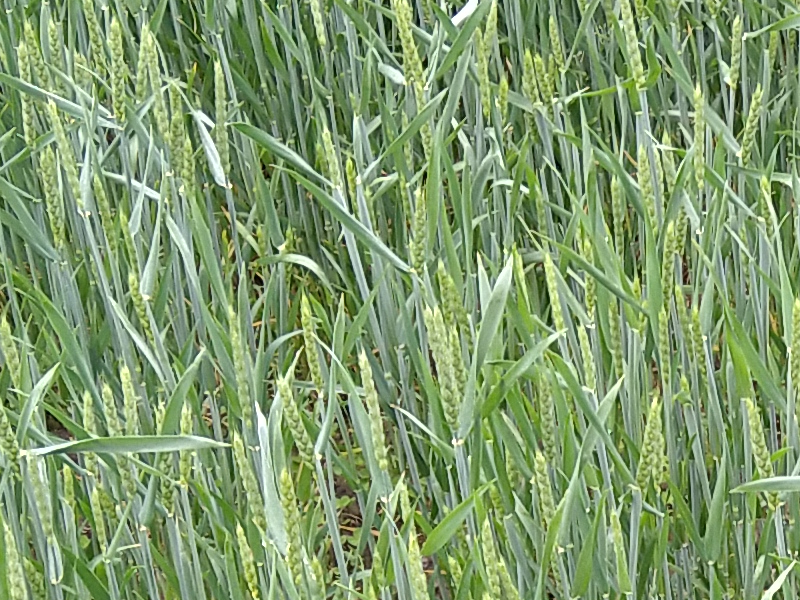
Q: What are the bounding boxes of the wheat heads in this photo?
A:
[234,432,266,533]
[608,302,625,380]
[603,0,611,18]
[653,143,665,215]
[481,515,500,597]
[636,146,657,234]
[0,354,22,468]
[769,29,779,68]
[233,332,253,430]
[420,0,430,21]
[414,187,426,279]
[487,486,504,518]
[636,300,649,337]
[90,490,105,553]
[789,25,795,50]
[610,176,625,264]
[279,470,303,585]
[498,76,508,115]
[692,305,709,385]
[534,53,554,122]
[101,383,136,493]
[236,522,259,597]
[256,226,265,255]
[414,83,434,161]
[284,222,292,288]
[97,482,116,520]
[136,22,151,100]
[635,279,641,298]
[680,373,690,399]
[728,14,744,87]
[407,536,436,600]
[359,346,387,470]
[574,0,588,14]
[170,115,181,169]
[659,308,673,385]
[315,143,330,182]
[403,52,412,84]
[168,84,184,134]
[684,172,692,202]
[109,16,125,125]
[474,27,491,117]
[578,326,597,390]
[448,274,475,349]
[437,259,453,327]
[663,131,678,192]
[633,399,658,495]
[349,93,356,108]
[403,0,412,25]
[83,391,97,474]
[506,446,516,487]
[321,125,343,195]
[179,402,193,489]
[0,318,22,389]
[393,0,424,80]
[345,155,359,213]
[497,565,529,600]
[312,558,326,600]
[0,45,7,65]
[22,558,56,600]
[372,552,386,588]
[155,406,168,436]
[28,452,53,531]
[25,20,50,91]
[549,549,563,592]
[160,451,175,513]
[526,109,538,141]
[448,556,477,600]
[300,296,323,392]
[633,0,644,25]
[82,0,106,83]
[145,35,169,140]
[127,275,151,338]
[535,456,555,524]
[279,379,315,470]
[46,19,66,98]
[743,84,763,163]
[660,221,676,305]
[183,137,194,194]
[46,99,82,208]
[535,184,548,247]
[399,486,412,522]
[484,0,498,50]
[694,83,706,190]
[14,40,36,147]
[612,512,623,560]
[400,179,412,225]
[795,360,800,426]
[656,433,666,479]
[616,0,646,90]
[80,55,89,85]
[120,215,142,280]
[523,47,540,107]
[675,285,693,361]
[227,305,239,334]
[64,463,76,509]
[539,374,556,457]
[789,295,800,385]
[399,110,412,171]
[3,528,29,600]
[762,175,775,236]
[409,236,416,265]
[582,241,597,314]
[675,206,689,256]
[73,47,83,84]
[425,308,461,435]
[746,397,781,505]
[121,366,136,443]
[546,13,565,73]
[543,254,564,333]
[740,228,753,285]
[40,152,66,245]
[305,0,326,45]
[214,60,231,176]
[93,175,117,254]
